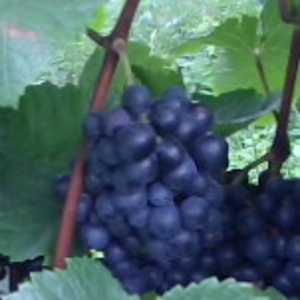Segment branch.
<instances>
[{"mask_svg": "<svg viewBox=\"0 0 300 300\" xmlns=\"http://www.w3.org/2000/svg\"><path fill=\"white\" fill-rule=\"evenodd\" d=\"M300 60V29L293 31L292 43L288 57L284 75L283 95L278 118V129L270 149L266 162L271 172L282 174L281 167L284 161L290 156V143L287 136L288 133V117L292 99V92L296 74L298 71V63Z\"/></svg>", "mask_w": 300, "mask_h": 300, "instance_id": "2", "label": "branch"}, {"mask_svg": "<svg viewBox=\"0 0 300 300\" xmlns=\"http://www.w3.org/2000/svg\"><path fill=\"white\" fill-rule=\"evenodd\" d=\"M84 169L85 161L82 158V153H79L77 162L73 169V178L65 198V204L62 208V218L59 226L55 258L54 262L52 263L53 267H57L59 269L65 268L64 259L69 254L71 249Z\"/></svg>", "mask_w": 300, "mask_h": 300, "instance_id": "3", "label": "branch"}, {"mask_svg": "<svg viewBox=\"0 0 300 300\" xmlns=\"http://www.w3.org/2000/svg\"><path fill=\"white\" fill-rule=\"evenodd\" d=\"M138 6L139 0L125 1L120 17L116 22V26L112 29L109 36H103L93 27L87 28L88 36L100 46L106 48V54L100 69L90 107L88 108V113L104 108V103L108 95L109 84L115 74L116 66L120 58V54L115 49L114 40L123 39L124 42L129 41V28L131 27Z\"/></svg>", "mask_w": 300, "mask_h": 300, "instance_id": "1", "label": "branch"}]
</instances>
